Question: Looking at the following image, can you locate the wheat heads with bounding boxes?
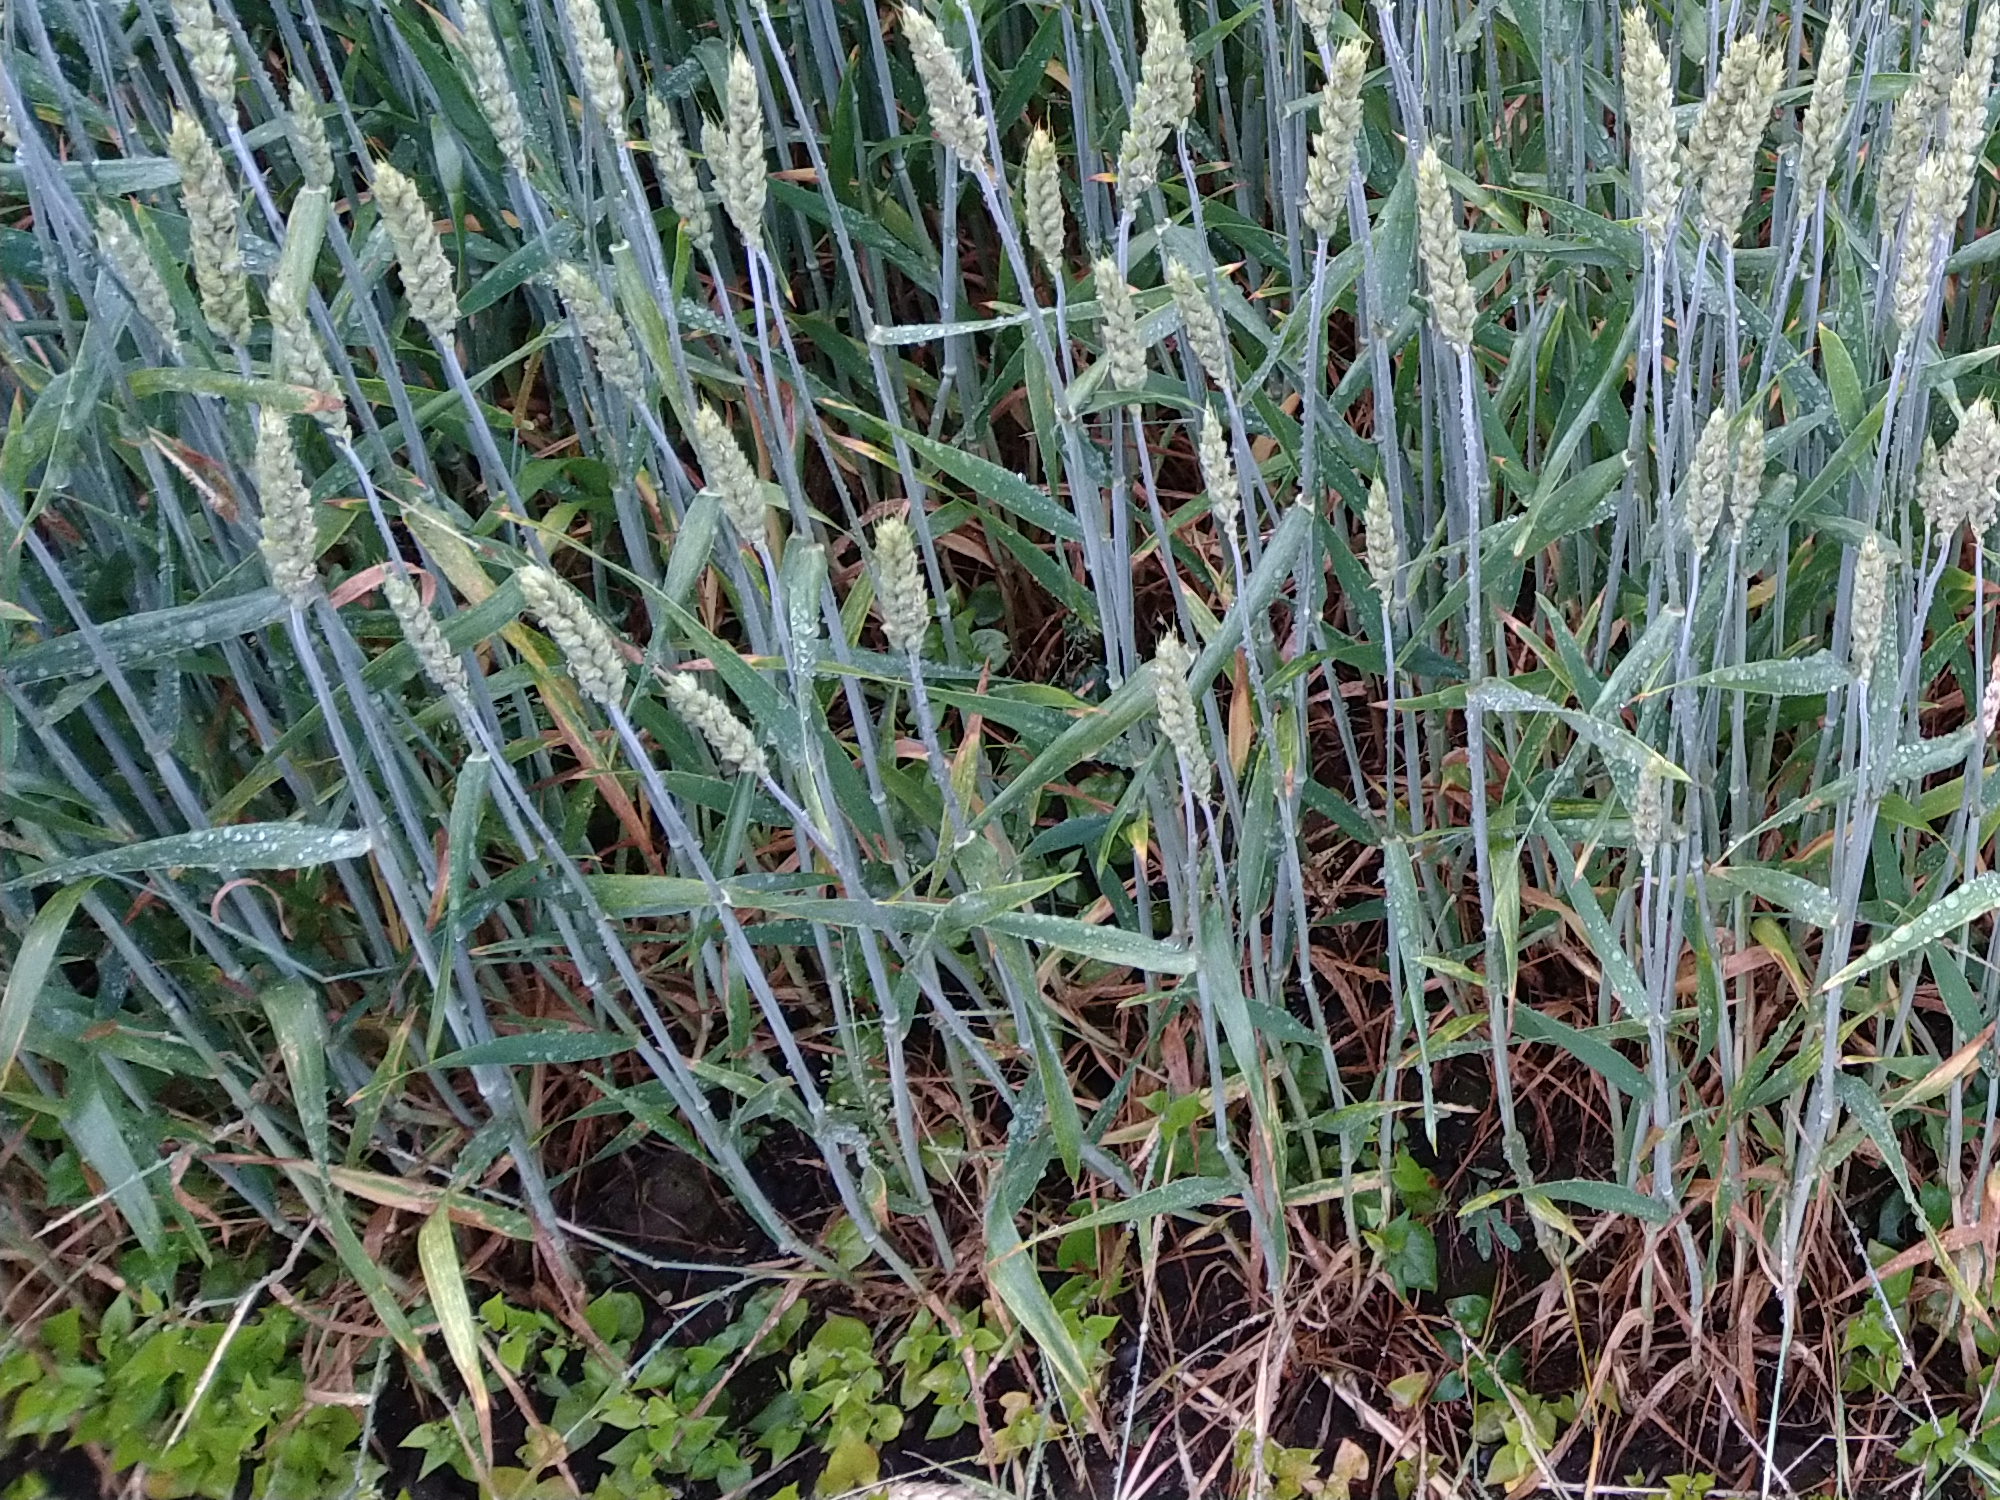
[1096,260,1147,385]
[1197,406,1240,531]
[1616,11,1679,241]
[1894,161,1943,338]
[1697,74,1769,225]
[688,392,769,547]
[1733,46,1785,225]
[556,0,621,116]
[1976,423,2000,525]
[561,264,651,404]
[1166,257,1231,385]
[642,95,714,261]
[1153,635,1216,809]
[99,211,166,336]
[1631,758,1662,848]
[1934,401,1997,525]
[1733,415,1769,519]
[901,7,988,173]
[1678,37,1766,210]
[461,0,527,163]
[1685,406,1733,547]
[1919,0,1972,111]
[870,519,931,658]
[1135,0,1194,113]
[1118,36,1169,207]
[1022,120,1069,258]
[1300,46,1364,225]
[365,155,461,329]
[1941,73,1972,214]
[1916,434,1941,504]
[290,74,334,183]
[1963,7,2000,195]
[246,409,320,600]
[694,116,736,186]
[1411,148,1484,342]
[520,571,622,702]
[1808,21,1851,183]
[1881,82,1923,208]
[1850,534,1888,659]
[136,0,239,111]
[275,285,346,431]
[1984,637,2000,728]
[387,572,474,699]
[1365,481,1398,596]
[723,40,769,241]
[174,117,265,317]
[666,669,769,771]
